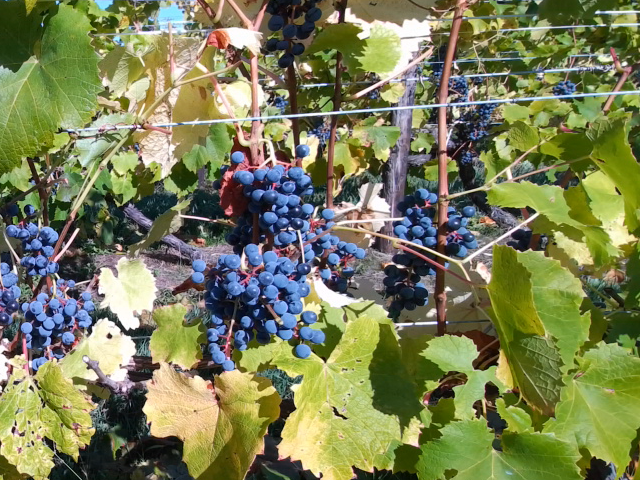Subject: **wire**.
<instances>
[{
    "label": "wire",
    "mask_w": 640,
    "mask_h": 480,
    "mask_svg": "<svg viewBox=\"0 0 640 480\" xmlns=\"http://www.w3.org/2000/svg\"><path fill=\"white\" fill-rule=\"evenodd\" d=\"M640 89L637 90H620V91H610L607 93L599 94L598 91H592L591 93L587 92H555V93H545L537 96L530 97H521V98H490V99H481L477 101H463V102H451V103H422L416 105H404V106H392V107H368V108H356L349 110H341V111H333V112H298V113H285V114H275L270 116H250L244 117L240 119H236L235 117L228 118H216L209 120H198V121H179V120H160V121H147V122H121V123H112V124H99V125H91V126H76V127H64V132H78V131H93V130H101V129H114V128H123V127H149V126H162V125H177V126H200V125H211L218 123H234V124H242L246 122L258 121V122H266L277 119H287V118H300V117H335V116H343V115H351L358 113H370V112H394V111H406V110H418L424 108H459L465 106H479L483 104H492V103H523V102H532L539 101L548 98H557V97H585L589 99H605L612 96H622V95H639Z\"/></svg>",
    "instance_id": "d2f4af69"
},
{
    "label": "wire",
    "mask_w": 640,
    "mask_h": 480,
    "mask_svg": "<svg viewBox=\"0 0 640 480\" xmlns=\"http://www.w3.org/2000/svg\"><path fill=\"white\" fill-rule=\"evenodd\" d=\"M489 320H490L489 316H477V317H472V318H458V319L445 320L444 324L445 325H452V324L474 323V322L489 321Z\"/></svg>",
    "instance_id": "a73af890"
}]
</instances>
